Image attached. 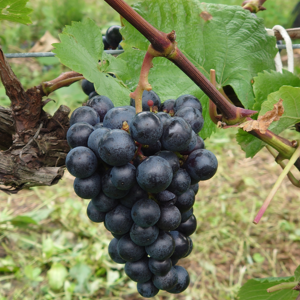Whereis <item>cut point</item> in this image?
Returning a JSON list of instances; mask_svg holds the SVG:
<instances>
[{"mask_svg": "<svg viewBox=\"0 0 300 300\" xmlns=\"http://www.w3.org/2000/svg\"><path fill=\"white\" fill-rule=\"evenodd\" d=\"M161 55L162 52L158 48H156L153 44H150L148 46V50L146 51L141 66L140 79L138 85L135 88V91L129 94L130 98L135 99L136 114L142 111V94L144 90H147L148 92L152 90V86L148 82L149 70L153 67L152 60L154 57H160Z\"/></svg>", "mask_w": 300, "mask_h": 300, "instance_id": "6a23745f", "label": "cut point"}]
</instances>
